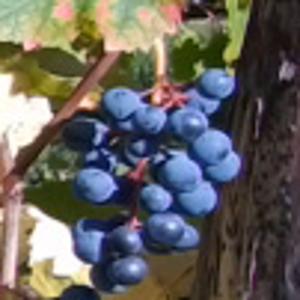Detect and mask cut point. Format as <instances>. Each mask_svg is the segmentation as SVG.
<instances>
[{"mask_svg": "<svg viewBox=\"0 0 300 300\" xmlns=\"http://www.w3.org/2000/svg\"><path fill=\"white\" fill-rule=\"evenodd\" d=\"M153 48L156 50V70L154 76L153 93L160 95L164 84V71L166 66V43L162 38L153 41Z\"/></svg>", "mask_w": 300, "mask_h": 300, "instance_id": "1", "label": "cut point"}]
</instances>
